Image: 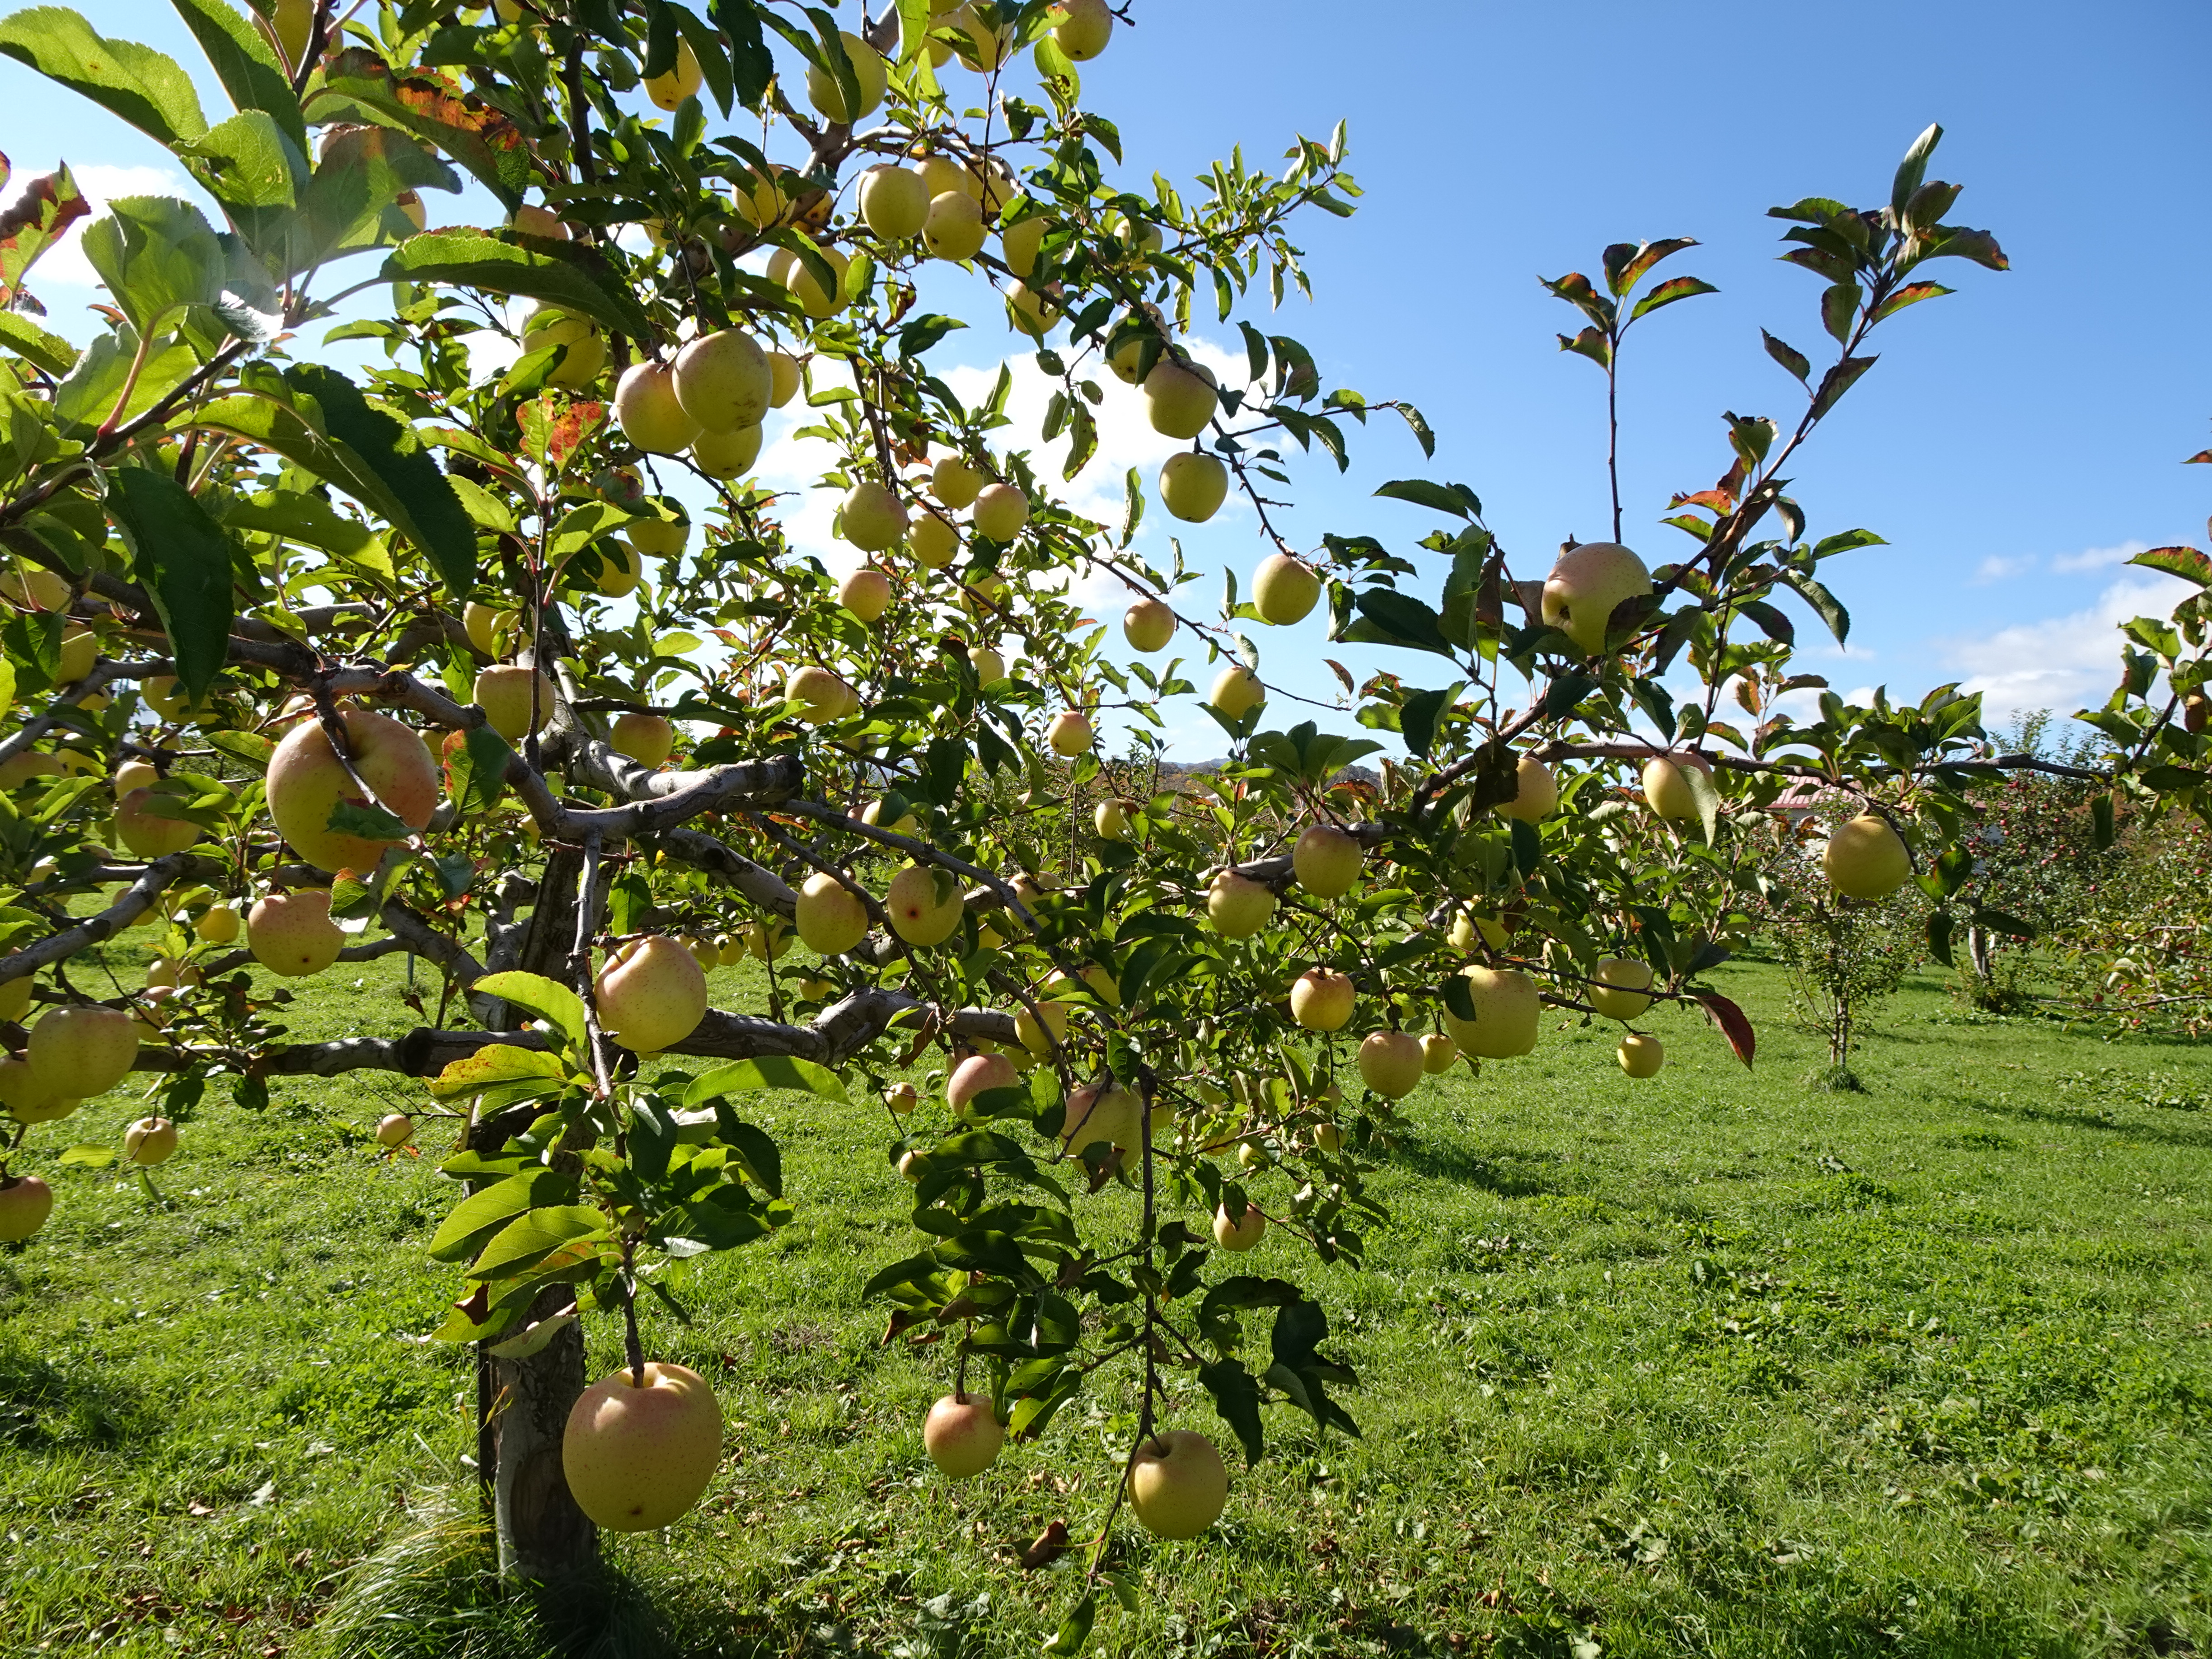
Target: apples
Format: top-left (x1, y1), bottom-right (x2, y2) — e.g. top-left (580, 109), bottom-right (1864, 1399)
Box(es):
top-left (732, 160), bottom-right (798, 233)
top-left (908, 508), bottom-right (962, 571)
top-left (280, 693), bottom-right (364, 751)
top-left (784, 665), bottom-right (849, 728)
top-left (561, 1360), bottom-right (725, 1532)
top-left (0, 1047), bottom-right (85, 1124)
top-left (863, 799), bottom-right (919, 854)
top-left (1252, 552), bottom-right (1322, 625)
top-left (951, 0), bottom-right (1014, 75)
top-left (1044, 969), bottom-right (1092, 1019)
top-left (406, 852), bottom-right (443, 896)
top-left (797, 869), bottom-right (870, 956)
top-left (1294, 825), bottom-right (1364, 899)
top-left (748, 909), bottom-right (796, 963)
top-left (72, 841), bottom-right (117, 892)
top-left (748, 350), bottom-right (802, 410)
top-left (417, 723), bottom-right (453, 763)
top-left (195, 904), bottom-right (241, 943)
top-left (860, 165), bottom-right (933, 243)
top-left (1387, 987), bottom-right (1422, 1020)
top-left (1106, 317), bottom-right (1172, 387)
top-left (219, 835), bottom-right (253, 872)
top-left (1003, 268), bottom-right (1068, 335)
top-left (785, 246), bottom-right (856, 321)
top-left (521, 305), bottom-right (606, 392)
top-left (1112, 214), bottom-right (1164, 270)
top-left (898, 1150), bottom-right (935, 1184)
top-left (1358, 1029), bottom-right (1426, 1102)
top-left (1048, 708), bottom-right (1094, 758)
top-left (1495, 1019), bottom-right (1537, 1064)
top-left (1822, 815), bottom-right (1913, 901)
top-left (1118, 301), bottom-right (1165, 345)
top-left (823, 682), bottom-right (863, 718)
top-left (1589, 960), bottom-right (1654, 1019)
top-left (961, 913), bottom-right (1007, 954)
top-left (766, 242), bottom-right (835, 307)
top-left (136, 985), bottom-right (201, 1044)
top-left (1058, 1078), bottom-right (1154, 1179)
top-left (924, 1392), bottom-right (1007, 1480)
top-left (946, 1050), bottom-right (1021, 1127)
top-left (1607, 892), bottom-right (1638, 924)
top-left (1310, 1077), bottom-right (1345, 1109)
top-left (28, 1001), bottom-right (141, 1098)
top-left (604, 711), bottom-right (675, 773)
top-left (19, 862), bottom-right (77, 917)
top-left (199, 680), bottom-right (262, 737)
top-left (443, 726), bottom-right (479, 770)
top-left (1005, 871), bottom-right (1065, 934)
top-left (1207, 869), bottom-right (1277, 941)
top-left (1444, 964), bottom-right (1542, 1058)
top-left (168, 874), bottom-right (216, 926)
top-left (932, 453), bottom-right (989, 510)
top-left (1489, 755), bottom-right (1558, 828)
top-left (1290, 964), bottom-right (1357, 1033)
top-left (1123, 598), bottom-right (1176, 652)
top-left (111, 886), bottom-right (167, 929)
top-left (958, 1019), bottom-right (998, 1061)
top-left (1212, 1200), bottom-right (1267, 1254)
top-left (1, 722), bottom-right (60, 817)
top-left (1642, 747), bottom-right (1716, 823)
top-left (115, 779), bottom-right (203, 857)
top-left (1238, 1136), bottom-right (1274, 1169)
top-left (300, 7), bottom-right (346, 60)
top-left (517, 811), bottom-right (566, 851)
top-left (1209, 664), bottom-right (1267, 723)
top-left (625, 496), bottom-right (691, 558)
top-left (909, 154), bottom-right (970, 219)
top-left (464, 795), bottom-right (511, 837)
top-left (20, 569), bottom-right (77, 618)
top-left (1151, 357), bottom-right (1222, 442)
top-left (957, 647), bottom-right (1005, 700)
top-left (687, 403), bottom-right (764, 481)
top-left (882, 1082), bottom-right (917, 1115)
top-left (1531, 972), bottom-right (1563, 1004)
top-left (1128, 1431), bottom-right (1228, 1541)
top-left (805, 31), bottom-right (889, 124)
top-left (636, 1032), bottom-right (667, 1063)
top-left (139, 658), bottom-right (212, 723)
top-left (606, 464), bottom-right (647, 502)
top-left (917, 0), bottom-right (967, 22)
top-left (900, 3), bottom-right (958, 71)
top-left (125, 1117), bottom-right (178, 1165)
top-left (1095, 797), bottom-right (1143, 839)
top-left (688, 942), bottom-right (721, 975)
top-left (1192, 1104), bottom-right (1235, 1156)
top-left (591, 931), bottom-right (709, 1054)
top-left (315, 118), bottom-right (371, 172)
top-left (846, 803), bottom-right (876, 838)
top-left (706, 933), bottom-right (744, 967)
top-left (1414, 1033), bottom-right (1461, 1074)
top-left (565, 537), bottom-right (644, 599)
top-left (40, 620), bottom-right (98, 685)
top-left (478, 843), bottom-right (506, 872)
top-left (1541, 539), bottom-right (1655, 658)
top-left (670, 327), bottom-right (773, 437)
top-left (839, 724), bottom-right (879, 762)
top-left (1542, 934), bottom-right (1574, 970)
top-left (1446, 922), bottom-right (1478, 953)
top-left (973, 482), bottom-right (1030, 541)
top-left (1160, 450), bottom-right (1230, 523)
top-left (1617, 1038), bottom-right (1663, 1080)
top-left (462, 586), bottom-right (537, 657)
top-left (241, 0), bottom-right (323, 75)
top-left (54, 681), bottom-right (114, 736)
top-left (114, 760), bottom-right (178, 811)
top-left (1633, 919), bottom-right (1644, 933)
top-left (1387, 861), bottom-right (1415, 888)
top-left (1144, 359), bottom-right (1197, 408)
top-left (919, 189), bottom-right (990, 263)
top-left (1002, 205), bottom-right (1069, 279)
top-left (1197, 1067), bottom-right (1232, 1107)
top-left (472, 663), bottom-right (558, 743)
top-left (1013, 1000), bottom-right (1069, 1053)
top-left (1127, 1080), bottom-right (1177, 1130)
top-left (1004, 1041), bottom-right (1038, 1074)
top-left (615, 363), bottom-right (706, 454)
top-left (636, 30), bottom-right (713, 114)
top-left (1067, 958), bottom-right (1129, 1014)
top-left (377, 1115), bottom-right (414, 1148)
top-left (56, 733), bottom-right (108, 790)
top-left (503, 200), bottom-right (572, 267)
top-left (1239, 1066), bottom-right (1286, 1102)
top-left (956, 567), bottom-right (1008, 618)
top-left (676, 929), bottom-right (710, 961)
top-left (839, 481), bottom-right (909, 551)
top-left (1314, 1123), bottom-right (1348, 1154)
top-left (766, 176), bottom-right (835, 238)
top-left (799, 968), bottom-right (834, 1004)
top-left (0, 939), bottom-right (36, 1031)
top-left (886, 864), bottom-right (970, 947)
top-left (249, 887), bottom-right (345, 977)
top-left (1049, 0), bottom-right (1114, 64)
top-left (210, 777), bottom-right (253, 829)
top-left (837, 568), bottom-right (892, 622)
top-left (144, 961), bottom-right (203, 1009)
top-left (263, 711), bottom-right (440, 878)
top-left (410, 130), bottom-right (440, 170)
top-left (1445, 895), bottom-right (1516, 957)
top-left (234, 828), bottom-right (283, 876)
top-left (956, 153), bottom-right (1016, 216)
top-left (0, 1174), bottom-right (53, 1243)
